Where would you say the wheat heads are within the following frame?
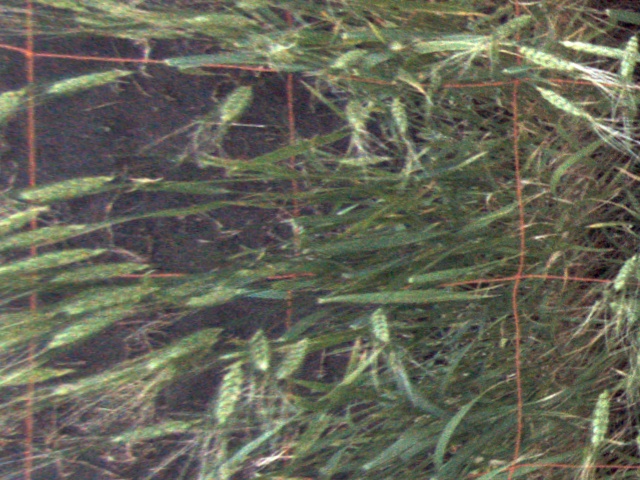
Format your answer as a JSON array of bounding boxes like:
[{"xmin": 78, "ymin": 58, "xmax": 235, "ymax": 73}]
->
[
  {"xmin": 373, "ymin": 311, "xmax": 388, "ymax": 345},
  {"xmin": 621, "ymin": 37, "xmax": 638, "ymax": 76},
  {"xmin": 5, "ymin": 367, "xmax": 69, "ymax": 381},
  {"xmin": 52, "ymin": 71, "xmax": 121, "ymax": 95},
  {"xmin": 589, "ymin": 389, "xmax": 612, "ymax": 444},
  {"xmin": 616, "ymin": 256, "xmax": 637, "ymax": 292},
  {"xmin": 234, "ymin": 265, "xmax": 281, "ymax": 281},
  {"xmin": 540, "ymin": 84, "xmax": 584, "ymax": 121},
  {"xmin": 56, "ymin": 264, "xmax": 151, "ymax": 287},
  {"xmin": 115, "ymin": 419, "xmax": 191, "ymax": 441},
  {"xmin": 253, "ymin": 332, "xmax": 267, "ymax": 369},
  {"xmin": 279, "ymin": 340, "xmax": 312, "ymax": 381},
  {"xmin": 328, "ymin": 45, "xmax": 361, "ymax": 70},
  {"xmin": 345, "ymin": 98, "xmax": 362, "ymax": 132},
  {"xmin": 0, "ymin": 209, "xmax": 50, "ymax": 237},
  {"xmin": 218, "ymin": 364, "xmax": 242, "ymax": 422},
  {"xmin": 49, "ymin": 314, "xmax": 121, "ymax": 345},
  {"xmin": 28, "ymin": 178, "xmax": 112, "ymax": 200},
  {"xmin": 562, "ymin": 39, "xmax": 637, "ymax": 61},
  {"xmin": 342, "ymin": 156, "xmax": 390, "ymax": 166},
  {"xmin": 492, "ymin": 12, "xmax": 531, "ymax": 38},
  {"xmin": 214, "ymin": 87, "xmax": 251, "ymax": 122},
  {"xmin": 191, "ymin": 13, "xmax": 249, "ymax": 26},
  {"xmin": 390, "ymin": 97, "xmax": 407, "ymax": 131},
  {"xmin": 298, "ymin": 421, "xmax": 327, "ymax": 455},
  {"xmin": 70, "ymin": 286, "xmax": 154, "ymax": 316},
  {"xmin": 187, "ymin": 291, "xmax": 241, "ymax": 310},
  {"xmin": 174, "ymin": 327, "xmax": 217, "ymax": 356},
  {"xmin": 522, "ymin": 47, "xmax": 570, "ymax": 74},
  {"xmin": 0, "ymin": 90, "xmax": 23, "ymax": 117},
  {"xmin": 1, "ymin": 250, "xmax": 101, "ymax": 277}
]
